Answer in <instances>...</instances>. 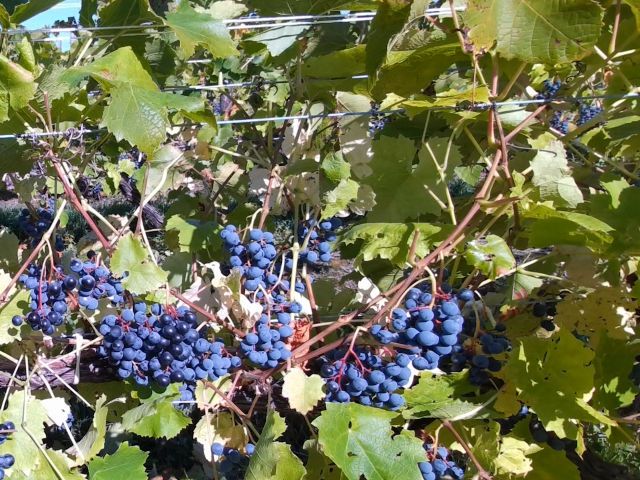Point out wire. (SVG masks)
<instances>
[{
  "mask_svg": "<svg viewBox=\"0 0 640 480\" xmlns=\"http://www.w3.org/2000/svg\"><path fill=\"white\" fill-rule=\"evenodd\" d=\"M360 15H377L376 10H358L343 14H304L289 16H264L256 18H223V23H256L244 26H226V31H246L258 28H281L289 26L338 25L351 22H372V17Z\"/></svg>",
  "mask_w": 640,
  "mask_h": 480,
  "instance_id": "wire-1",
  "label": "wire"
},
{
  "mask_svg": "<svg viewBox=\"0 0 640 480\" xmlns=\"http://www.w3.org/2000/svg\"><path fill=\"white\" fill-rule=\"evenodd\" d=\"M165 24L152 25L148 22L145 25H92V26H62V27H27L0 29V34L29 33V32H64V31H94V30H147L143 32H112V33H90L85 35H72L59 38H31V43H61L74 40H87L92 38H114V37H145L157 34H169L170 30L165 29Z\"/></svg>",
  "mask_w": 640,
  "mask_h": 480,
  "instance_id": "wire-2",
  "label": "wire"
},
{
  "mask_svg": "<svg viewBox=\"0 0 640 480\" xmlns=\"http://www.w3.org/2000/svg\"><path fill=\"white\" fill-rule=\"evenodd\" d=\"M405 110L396 111H374V112H349L339 111L333 113H315L309 115H297V116H285V117H256L251 119H238V120H218V125H241V124H254L258 122H272L281 123L287 121H299V120H312L317 118H335L341 116L347 117H377V116H399L405 115Z\"/></svg>",
  "mask_w": 640,
  "mask_h": 480,
  "instance_id": "wire-3",
  "label": "wire"
},
{
  "mask_svg": "<svg viewBox=\"0 0 640 480\" xmlns=\"http://www.w3.org/2000/svg\"><path fill=\"white\" fill-rule=\"evenodd\" d=\"M632 97H640V92L637 94H620V95H600V96H584V97H556V98H548V97H540V98H530L523 100H511V101H497L490 103H482V104H472V105H456V110H474V109H484V108H492L499 106H513V105H525L532 103H550V102H564V101H580V100H596L602 98H632Z\"/></svg>",
  "mask_w": 640,
  "mask_h": 480,
  "instance_id": "wire-4",
  "label": "wire"
},
{
  "mask_svg": "<svg viewBox=\"0 0 640 480\" xmlns=\"http://www.w3.org/2000/svg\"><path fill=\"white\" fill-rule=\"evenodd\" d=\"M106 131H107L106 127H98L94 129L52 130V131H41L36 133H5V134H0V139L39 138L43 136H55V135L96 134V133L106 132Z\"/></svg>",
  "mask_w": 640,
  "mask_h": 480,
  "instance_id": "wire-5",
  "label": "wire"
},
{
  "mask_svg": "<svg viewBox=\"0 0 640 480\" xmlns=\"http://www.w3.org/2000/svg\"><path fill=\"white\" fill-rule=\"evenodd\" d=\"M464 6H455V7H441V8H428L427 12L430 13V18H441V17H451V12L464 11Z\"/></svg>",
  "mask_w": 640,
  "mask_h": 480,
  "instance_id": "wire-6",
  "label": "wire"
}]
</instances>
